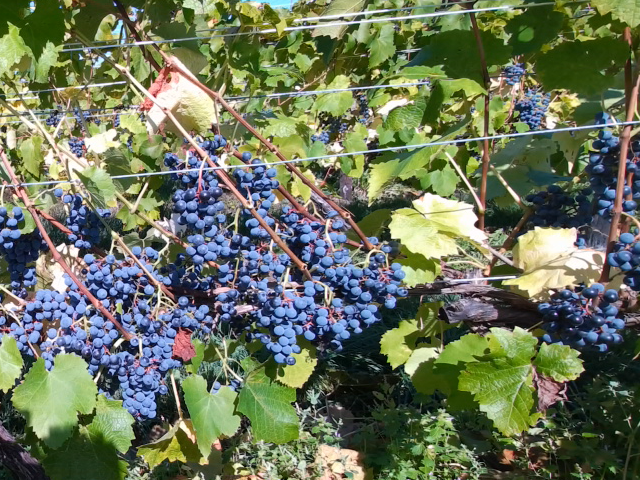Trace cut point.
<instances>
[{
    "label": "cut point",
    "instance_id": "1",
    "mask_svg": "<svg viewBox=\"0 0 640 480\" xmlns=\"http://www.w3.org/2000/svg\"><path fill=\"white\" fill-rule=\"evenodd\" d=\"M623 216L629 218L631 221L634 222L635 225L639 224V220L637 217H635L634 215H632L631 213L627 212L626 210H622V214Z\"/></svg>",
    "mask_w": 640,
    "mask_h": 480
},
{
    "label": "cut point",
    "instance_id": "2",
    "mask_svg": "<svg viewBox=\"0 0 640 480\" xmlns=\"http://www.w3.org/2000/svg\"><path fill=\"white\" fill-rule=\"evenodd\" d=\"M375 252V253H382L380 250H378L377 248H374L373 251H368L366 259L364 260V264H367L369 259H370V255Z\"/></svg>",
    "mask_w": 640,
    "mask_h": 480
}]
</instances>
